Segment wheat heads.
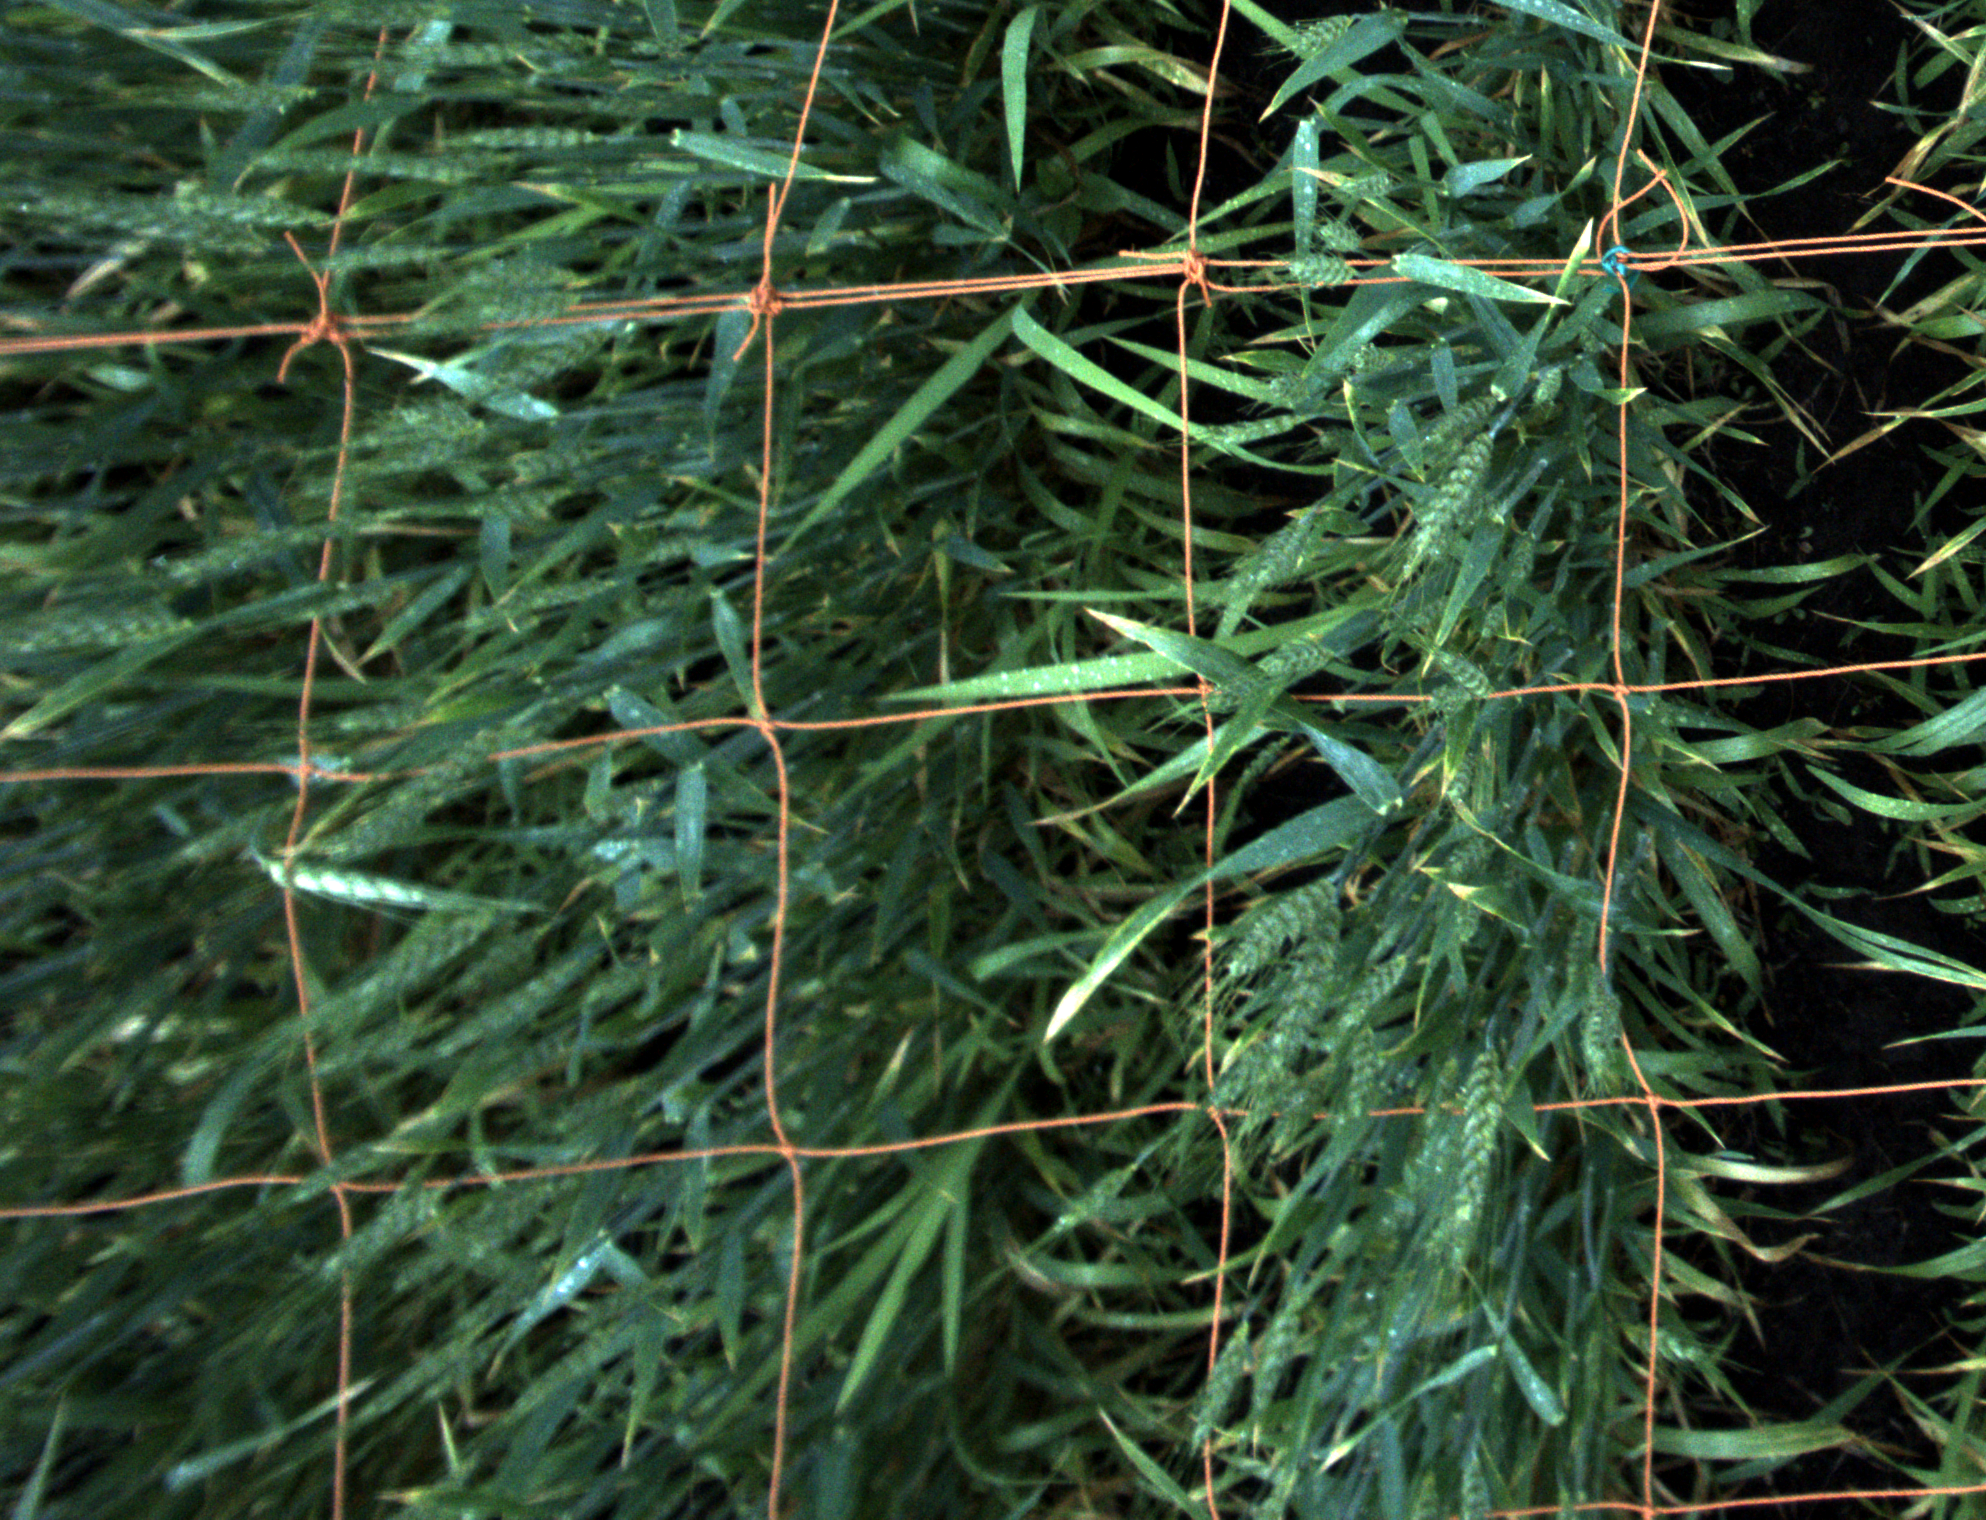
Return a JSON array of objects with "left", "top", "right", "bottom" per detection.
[
  {"left": 486, "top": 321, "right": 617, "bottom": 396},
  {"left": 340, "top": 56, "right": 441, "bottom": 81},
  {"left": 486, "top": 1020, "right": 586, "bottom": 1083},
  {"left": 27, "top": 179, "right": 273, "bottom": 256},
  {"left": 1506, "top": 540, "right": 1537, "bottom": 582},
  {"left": 1211, "top": 410, "right": 1295, "bottom": 445},
  {"left": 1251, "top": 500, "right": 1321, "bottom": 588},
  {"left": 1208, "top": 1042, "right": 1267, "bottom": 1105},
  {"left": 1412, "top": 1466, "right": 1438, "bottom": 1518},
  {"left": 1430, "top": 647, "right": 1494, "bottom": 694},
  {"left": 1421, "top": 1054, "right": 1461, "bottom": 1127},
  {"left": 1376, "top": 793, "right": 1442, "bottom": 822},
  {"left": 630, "top": 35, "right": 659, "bottom": 60},
  {"left": 1292, "top": 13, "right": 1354, "bottom": 60},
  {"left": 1578, "top": 1007, "right": 1611, "bottom": 1073},
  {"left": 512, "top": 690, "right": 586, "bottom": 744},
  {"left": 658, "top": 31, "right": 687, "bottom": 54},
  {"left": 1049, "top": 1163, "right": 1135, "bottom": 1230},
  {"left": 575, "top": 956, "right": 658, "bottom": 1010},
  {"left": 350, "top": 1332, "right": 476, "bottom": 1423},
  {"left": 594, "top": 833, "right": 636, "bottom": 861},
  {"left": 310, "top": 1187, "right": 446, "bottom": 1280},
  {"left": 561, "top": 1273, "right": 676, "bottom": 1332},
  {"left": 1582, "top": 1329, "right": 1605, "bottom": 1393},
  {"left": 368, "top": 398, "right": 476, "bottom": 446},
  {"left": 1240, "top": 734, "right": 1293, "bottom": 787},
  {"left": 342, "top": 426, "right": 462, "bottom": 480},
  {"left": 383, "top": 718, "right": 502, "bottom": 811},
  {"left": 1418, "top": 394, "right": 1497, "bottom": 445},
  {"left": 1582, "top": 322, "right": 1602, "bottom": 356},
  {"left": 1448, "top": 752, "right": 1480, "bottom": 799},
  {"left": 618, "top": 1155, "right": 686, "bottom": 1203},
  {"left": 1620, "top": 1318, "right": 1699, "bottom": 1363},
  {"left": 1284, "top": 249, "right": 1355, "bottom": 288},
  {"left": 1454, "top": 899, "right": 1479, "bottom": 942},
  {"left": 1228, "top": 876, "right": 1341, "bottom": 978},
  {"left": 1335, "top": 953, "right": 1409, "bottom": 1028},
  {"left": 1398, "top": 346, "right": 1433, "bottom": 373},
  {"left": 286, "top": 1134, "right": 384, "bottom": 1204},
  {"left": 1190, "top": 1318, "right": 1251, "bottom": 1449},
  {"left": 1568, "top": 914, "right": 1590, "bottom": 995},
  {"left": 0, "top": 613, "right": 193, "bottom": 656},
  {"left": 503, "top": 439, "right": 595, "bottom": 481},
  {"left": 506, "top": 1309, "right": 651, "bottom": 1422},
  {"left": 1462, "top": 1448, "right": 1491, "bottom": 1517},
  {"left": 1269, "top": 907, "right": 1349, "bottom": 1073},
  {"left": 1312, "top": 219, "right": 1364, "bottom": 255},
  {"left": 642, "top": 529, "right": 717, "bottom": 563},
  {"left": 553, "top": 1074, "right": 640, "bottom": 1136},
  {"left": 1361, "top": 1209, "right": 1401, "bottom": 1278},
  {"left": 465, "top": 254, "right": 571, "bottom": 291},
  {"left": 584, "top": 93, "right": 659, "bottom": 119},
  {"left": 1318, "top": 426, "right": 1362, "bottom": 455},
  {"left": 433, "top": 946, "right": 586, "bottom": 1056},
  {"left": 642, "top": 581, "right": 690, "bottom": 614},
  {"left": 1443, "top": 832, "right": 1500, "bottom": 877},
  {"left": 1328, "top": 471, "right": 1369, "bottom": 507},
  {"left": 1418, "top": 1203, "right": 1459, "bottom": 1264},
  {"left": 1532, "top": 364, "right": 1565, "bottom": 405},
  {"left": 591, "top": 773, "right": 655, "bottom": 820},
  {"left": 331, "top": 692, "right": 431, "bottom": 740},
  {"left": 319, "top": 794, "right": 431, "bottom": 855},
  {"left": 1267, "top": 1056, "right": 1314, "bottom": 1114},
  {"left": 119, "top": 70, "right": 320, "bottom": 113},
  {"left": 302, "top": 580, "right": 391, "bottom": 622},
  {"left": 1458, "top": 1047, "right": 1505, "bottom": 1261},
  {"left": 453, "top": 917, "right": 548, "bottom": 985},
  {"left": 1346, "top": 1026, "right": 1380, "bottom": 1114},
  {"left": 1478, "top": 596, "right": 1508, "bottom": 639},
  {"left": 1258, "top": 636, "right": 1337, "bottom": 679},
  {"left": 285, "top": 501, "right": 371, "bottom": 548},
  {"left": 446, "top": 1254, "right": 554, "bottom": 1333},
  {"left": 491, "top": 821, "right": 599, "bottom": 847},
  {"left": 430, "top": 1333, "right": 505, "bottom": 1400},
  {"left": 1199, "top": 687, "right": 1242, "bottom": 715},
  {"left": 1253, "top": 1286, "right": 1305, "bottom": 1406},
  {"left": 350, "top": 903, "right": 492, "bottom": 997},
  {"left": 467, "top": 284, "right": 579, "bottom": 330},
  {"left": 402, "top": 26, "right": 590, "bottom": 65},
  {"left": 165, "top": 527, "right": 279, "bottom": 587},
  {"left": 1409, "top": 1110, "right": 1458, "bottom": 1197},
  {"left": 394, "top": 1245, "right": 454, "bottom": 1296},
  {"left": 318, "top": 1006, "right": 447, "bottom": 1077},
  {"left": 316, "top": 0, "right": 455, "bottom": 30},
  {"left": 247, "top": 143, "right": 472, "bottom": 186},
  {"left": 171, "top": 181, "right": 328, "bottom": 228},
  {"left": 1412, "top": 430, "right": 1496, "bottom": 561},
  {"left": 1267, "top": 375, "right": 1313, "bottom": 406},
  {"left": 1329, "top": 172, "right": 1388, "bottom": 204},
  {"left": 275, "top": 869, "right": 426, "bottom": 908},
  {"left": 318, "top": 238, "right": 450, "bottom": 271},
  {"left": 1350, "top": 343, "right": 1398, "bottom": 373},
  {"left": 466, "top": 489, "right": 559, "bottom": 527},
  {"left": 439, "top": 122, "right": 605, "bottom": 156},
  {"left": 528, "top": 570, "right": 618, "bottom": 613},
  {"left": 457, "top": 1172, "right": 591, "bottom": 1238},
  {"left": 177, "top": 794, "right": 291, "bottom": 865},
  {"left": 1402, "top": 592, "right": 1450, "bottom": 630},
  {"left": 1430, "top": 684, "right": 1475, "bottom": 717}
]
